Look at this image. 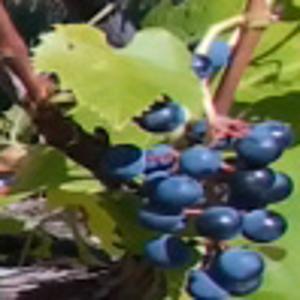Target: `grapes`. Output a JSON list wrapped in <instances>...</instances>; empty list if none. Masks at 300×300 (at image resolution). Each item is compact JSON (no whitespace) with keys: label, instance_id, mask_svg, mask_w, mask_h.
Here are the masks:
<instances>
[{"label":"grapes","instance_id":"1","mask_svg":"<svg viewBox=\"0 0 300 300\" xmlns=\"http://www.w3.org/2000/svg\"><path fill=\"white\" fill-rule=\"evenodd\" d=\"M284 120L247 122L205 116L187 131L176 152L167 140L153 148L131 144L104 149L99 174L112 183L143 175L136 213L149 262L161 272L188 276L191 300H232L251 294L269 274L266 255L246 250L287 233L288 221L268 210L290 196L294 179L269 164L293 144Z\"/></svg>","mask_w":300,"mask_h":300},{"label":"grapes","instance_id":"2","mask_svg":"<svg viewBox=\"0 0 300 300\" xmlns=\"http://www.w3.org/2000/svg\"><path fill=\"white\" fill-rule=\"evenodd\" d=\"M185 122V111L172 99L152 104L136 119L138 128L156 135L175 133L183 128Z\"/></svg>","mask_w":300,"mask_h":300},{"label":"grapes","instance_id":"3","mask_svg":"<svg viewBox=\"0 0 300 300\" xmlns=\"http://www.w3.org/2000/svg\"><path fill=\"white\" fill-rule=\"evenodd\" d=\"M190 62L193 73L200 79H207L232 64V47L225 41H213L205 54H192Z\"/></svg>","mask_w":300,"mask_h":300}]
</instances>
